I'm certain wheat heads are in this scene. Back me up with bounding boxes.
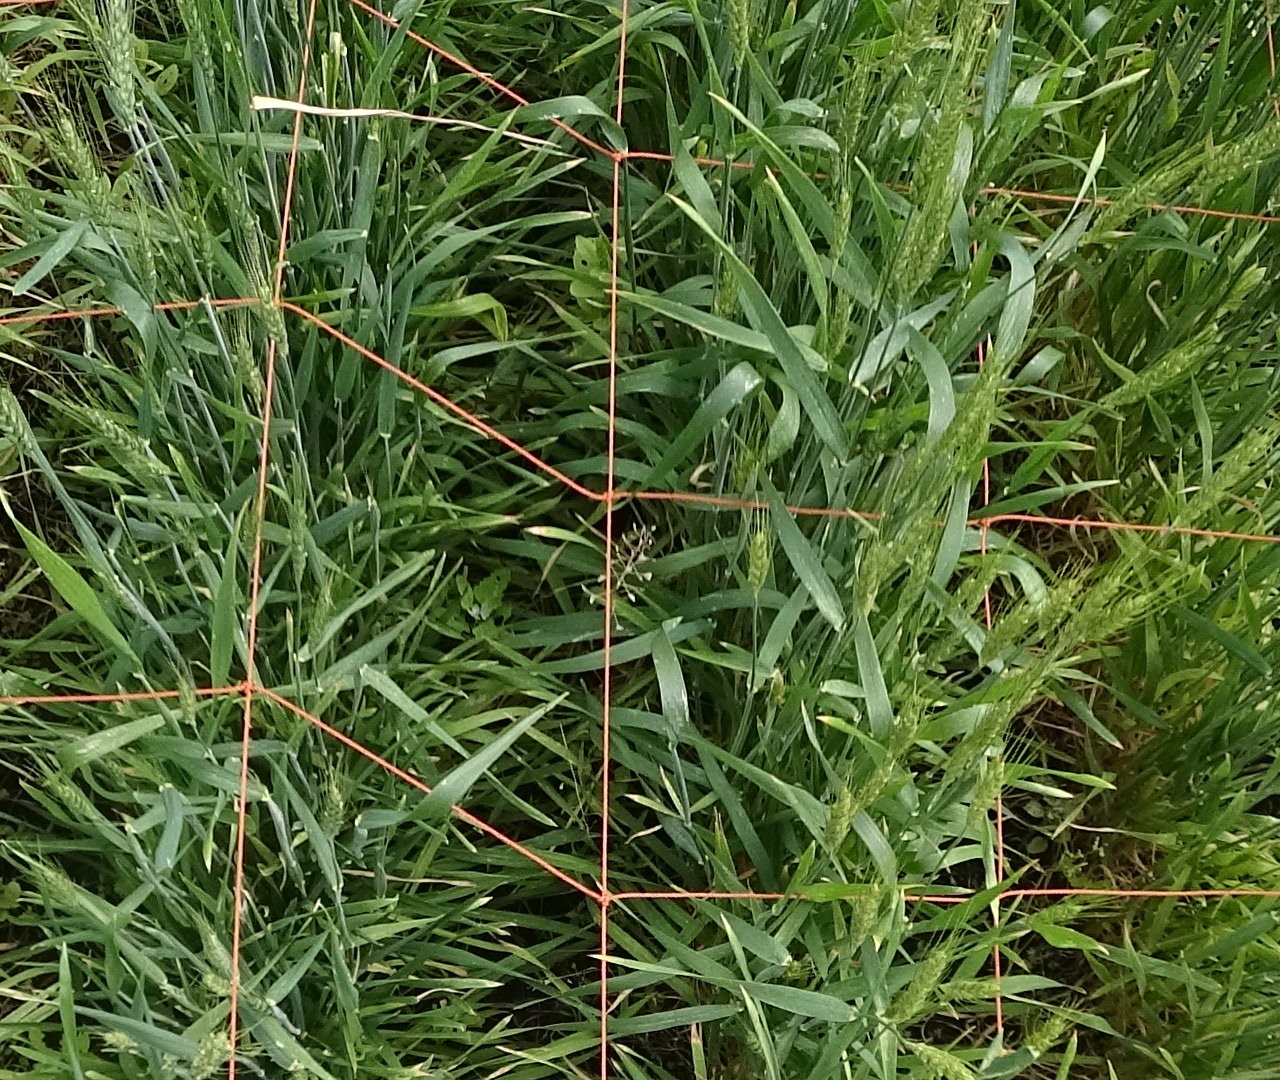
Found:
[189,1031,236,1073]
[1026,901,1087,926]
[1033,1017,1065,1048]
[853,548,877,614]
[730,445,758,491]
[826,785,852,844]
[42,868,77,910]
[205,973,232,995]
[1085,162,1190,246]
[101,0,138,121]
[829,186,853,272]
[910,87,966,189]
[60,112,105,219]
[322,790,343,838]
[926,636,954,669]
[913,1041,970,1080]
[723,261,742,318]
[891,706,922,755]
[949,977,1002,998]
[895,549,932,618]
[876,208,924,288]
[101,1029,137,1052]
[971,192,1016,241]
[233,207,262,256]
[309,588,332,647]
[1182,433,1258,526]
[0,384,47,453]
[1024,575,1078,631]
[897,499,938,560]
[942,575,971,611]
[49,776,82,818]
[132,227,155,296]
[1086,594,1147,645]
[226,335,271,402]
[750,533,771,593]
[965,553,1001,615]
[731,0,749,64]
[893,955,945,1020]
[77,400,153,474]
[852,884,885,942]
[831,61,875,146]
[1058,572,1125,656]
[249,995,276,1012]
[16,179,42,242]
[852,765,892,804]
[933,382,1000,470]
[201,935,236,973]
[180,0,223,76]
[979,602,1032,664]
[281,0,302,18]
[964,758,1007,827]
[941,697,1010,793]
[818,296,856,363]
[1089,340,1202,411]
[172,671,202,719]
[286,484,310,585]
[1202,126,1277,191]
[971,134,1010,197]
[885,0,939,78]
[194,218,217,265]
[903,189,962,297]
[253,288,290,346]
[858,404,909,461]
[1010,658,1051,721]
